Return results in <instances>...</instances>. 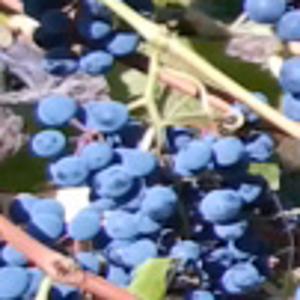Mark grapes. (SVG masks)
<instances>
[{"mask_svg": "<svg viewBox=\"0 0 300 300\" xmlns=\"http://www.w3.org/2000/svg\"><path fill=\"white\" fill-rule=\"evenodd\" d=\"M73 119L104 142L64 156L67 136L61 128ZM42 129L29 143L32 159L50 162L47 180L56 189L90 187L85 210L66 225V207L33 195L14 198L10 221L29 227L43 244L70 238L91 242L75 261L124 287L133 271L155 257L171 255L201 276L203 287L188 288V300L241 299L263 281L248 237L247 209L262 205L266 180L244 174L243 166L270 163L274 141L255 128L243 136L205 135L174 127L164 116L136 100L102 99L77 104L63 94L45 95L32 109Z\"/></svg>", "mask_w": 300, "mask_h": 300, "instance_id": "obj_1", "label": "grapes"}, {"mask_svg": "<svg viewBox=\"0 0 300 300\" xmlns=\"http://www.w3.org/2000/svg\"><path fill=\"white\" fill-rule=\"evenodd\" d=\"M243 8L256 25H272L286 43L300 40V6L286 0H243Z\"/></svg>", "mask_w": 300, "mask_h": 300, "instance_id": "obj_4", "label": "grapes"}, {"mask_svg": "<svg viewBox=\"0 0 300 300\" xmlns=\"http://www.w3.org/2000/svg\"><path fill=\"white\" fill-rule=\"evenodd\" d=\"M48 295L52 300H78L80 292L73 285H61L54 283L48 289Z\"/></svg>", "mask_w": 300, "mask_h": 300, "instance_id": "obj_6", "label": "grapes"}, {"mask_svg": "<svg viewBox=\"0 0 300 300\" xmlns=\"http://www.w3.org/2000/svg\"><path fill=\"white\" fill-rule=\"evenodd\" d=\"M279 86L284 92L281 110L300 121V56H288L280 66Z\"/></svg>", "mask_w": 300, "mask_h": 300, "instance_id": "obj_5", "label": "grapes"}, {"mask_svg": "<svg viewBox=\"0 0 300 300\" xmlns=\"http://www.w3.org/2000/svg\"><path fill=\"white\" fill-rule=\"evenodd\" d=\"M251 94L254 97L260 99L261 101H264V102L268 103L269 105H271L270 96L264 89L254 90L251 92Z\"/></svg>", "mask_w": 300, "mask_h": 300, "instance_id": "obj_8", "label": "grapes"}, {"mask_svg": "<svg viewBox=\"0 0 300 300\" xmlns=\"http://www.w3.org/2000/svg\"><path fill=\"white\" fill-rule=\"evenodd\" d=\"M62 0H25L23 13L41 25L31 35L33 46L45 52L40 58L44 72L51 77H69L79 70L86 76H101L119 58L135 53L139 37L132 30L115 33V15L98 0H79L76 18L59 11ZM90 48L82 55L71 52L75 43Z\"/></svg>", "mask_w": 300, "mask_h": 300, "instance_id": "obj_2", "label": "grapes"}, {"mask_svg": "<svg viewBox=\"0 0 300 300\" xmlns=\"http://www.w3.org/2000/svg\"><path fill=\"white\" fill-rule=\"evenodd\" d=\"M231 111L242 114L246 125L256 126L261 121L260 119L248 114L235 104L231 106Z\"/></svg>", "mask_w": 300, "mask_h": 300, "instance_id": "obj_7", "label": "grapes"}, {"mask_svg": "<svg viewBox=\"0 0 300 300\" xmlns=\"http://www.w3.org/2000/svg\"><path fill=\"white\" fill-rule=\"evenodd\" d=\"M44 284L43 272L30 268L24 253L9 245L0 247V299L31 300Z\"/></svg>", "mask_w": 300, "mask_h": 300, "instance_id": "obj_3", "label": "grapes"}]
</instances>
